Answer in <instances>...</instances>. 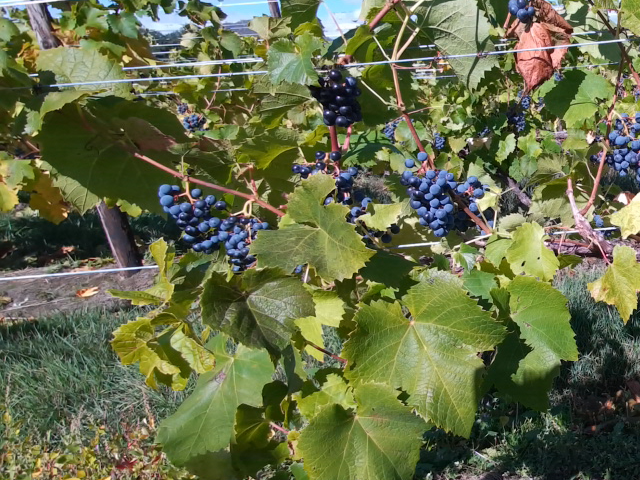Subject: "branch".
<instances>
[{"mask_svg": "<svg viewBox=\"0 0 640 480\" xmlns=\"http://www.w3.org/2000/svg\"><path fill=\"white\" fill-rule=\"evenodd\" d=\"M618 46L620 47V49H621V51L623 53L621 55V64H620L619 71H618L617 86L615 88V92L613 93V102H612L611 108H608V116H607L608 124H607V132L605 134V145L603 146V149H602V154H601V158H600V164H599V167L597 168V173L595 174V179H594L592 188L590 190L588 200H587L586 204L583 206V208L580 211L581 215H584L588 211V209L590 208V206H591V204L593 202L596 190L598 188L600 177H601L602 173L604 172L605 160H606L607 153H608V150H609V140L607 138V135L609 133H611V130H612L611 117H612V113H613L614 107L616 105V96H617V93H618L619 88H620L621 74H622V71L624 69V60L625 59H626V62L628 64L629 68L631 69L635 79H636L637 86L640 87V75H639V73L637 71V68L635 67V65H634V63H633V61H632V59L630 57V54H629L628 50L626 49V47H625V45L623 43H618Z\"/></svg>", "mask_w": 640, "mask_h": 480, "instance_id": "obj_1", "label": "branch"}, {"mask_svg": "<svg viewBox=\"0 0 640 480\" xmlns=\"http://www.w3.org/2000/svg\"><path fill=\"white\" fill-rule=\"evenodd\" d=\"M391 72H392L393 82H394V87H395L396 100L398 102L402 117L405 120L406 124L408 125L409 132H410L412 138L414 139L415 144L417 145L418 149L420 151H423L424 150V146H423L422 142L420 141L417 133L414 130L412 121H411L410 117L408 116V114L406 112V109H405V106H404V103H403V100H402V97H401L399 79H398V74H397V70H396V64H391Z\"/></svg>", "mask_w": 640, "mask_h": 480, "instance_id": "obj_3", "label": "branch"}, {"mask_svg": "<svg viewBox=\"0 0 640 480\" xmlns=\"http://www.w3.org/2000/svg\"><path fill=\"white\" fill-rule=\"evenodd\" d=\"M132 156L135 157V158H139V159H141L143 161H146V162L152 164L153 166H155L157 168H160V169L166 171L167 173H169V174H171L173 176L181 178L182 180L193 182V183H198V184L203 185L205 187L213 188V189H215L217 191L229 193V194H232V195L240 197V198H246L248 200H251L252 202H255V203L261 205L263 208H265L266 210H268L269 212H271L273 214H276V215H278L280 217H284L285 216V213L283 211L278 210V208L275 207L274 205H272L271 203L264 202L263 200L255 197V196H253V195H251L249 193H242L240 191H236V190L228 188V187H221L218 184L210 183V182L205 181V180L200 179V178L187 176V175H185L183 173L175 171L174 169L168 167L165 164H162V163H160L158 161H155L154 159H152V158H150L148 156H145V155H143L141 153H138V152H133Z\"/></svg>", "mask_w": 640, "mask_h": 480, "instance_id": "obj_2", "label": "branch"}, {"mask_svg": "<svg viewBox=\"0 0 640 480\" xmlns=\"http://www.w3.org/2000/svg\"><path fill=\"white\" fill-rule=\"evenodd\" d=\"M597 15L599 16V18L602 20V22L605 24L607 30L609 31V33L613 36V38H619L618 33L614 30V28L612 27V25L610 24V22L607 20V18L604 16L602 11H598Z\"/></svg>", "mask_w": 640, "mask_h": 480, "instance_id": "obj_5", "label": "branch"}, {"mask_svg": "<svg viewBox=\"0 0 640 480\" xmlns=\"http://www.w3.org/2000/svg\"><path fill=\"white\" fill-rule=\"evenodd\" d=\"M421 6L420 2H416L406 13L404 20L402 22V25L400 27L399 33L396 37V41L394 43V48H393V53L391 56V59H397L398 56V50H399V45L401 43V40L403 38V35L405 33V29L407 27V24L409 22L410 17L412 16V14L414 13V11Z\"/></svg>", "mask_w": 640, "mask_h": 480, "instance_id": "obj_4", "label": "branch"}]
</instances>
